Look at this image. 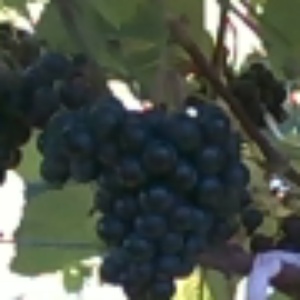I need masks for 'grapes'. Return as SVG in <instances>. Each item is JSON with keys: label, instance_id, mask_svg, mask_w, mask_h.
Wrapping results in <instances>:
<instances>
[{"label": "grapes", "instance_id": "obj_1", "mask_svg": "<svg viewBox=\"0 0 300 300\" xmlns=\"http://www.w3.org/2000/svg\"><path fill=\"white\" fill-rule=\"evenodd\" d=\"M80 55L41 52L0 22V184L21 162L32 126L40 175L51 186L98 181L96 230L109 243L103 281L133 300H169L201 254L232 236L250 179L241 141L216 104L194 117L165 108L126 111L92 87Z\"/></svg>", "mask_w": 300, "mask_h": 300}]
</instances>
